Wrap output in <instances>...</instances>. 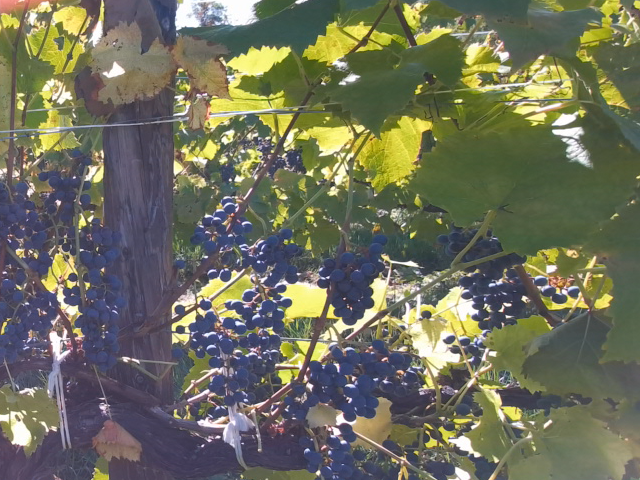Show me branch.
<instances>
[{
  "instance_id": "1",
  "label": "branch",
  "mask_w": 640,
  "mask_h": 480,
  "mask_svg": "<svg viewBox=\"0 0 640 480\" xmlns=\"http://www.w3.org/2000/svg\"><path fill=\"white\" fill-rule=\"evenodd\" d=\"M352 135L353 136L347 141L345 148L343 149L338 159L336 160L332 171L326 176L324 183L321 184L319 188L314 192V194L305 201V203L302 205V207L298 211H296L293 215H291L289 218L285 219L282 222V225L284 227L290 226L293 222L297 221L300 217H302L308 211L311 205L320 198L321 194L325 190H328L331 187V183L333 179L338 175L342 167V164L344 163L346 157L349 155L350 151L352 150L353 145L361 138L360 143L357 145V147L355 148V151L352 153L351 157L349 158V161L347 162L348 203L346 205V209L343 214V220L339 227L340 243L337 246L336 251L334 252V268L337 271H340L342 269L341 254L343 253V250L346 247L342 232L347 230L348 224L351 220L353 207L355 205V190H354V170L356 167L355 163H356V160L359 158V155L362 153V150L367 145L368 140L371 138V134L369 132L365 133V130L363 128L354 130L352 132Z\"/></svg>"
},
{
  "instance_id": "2",
  "label": "branch",
  "mask_w": 640,
  "mask_h": 480,
  "mask_svg": "<svg viewBox=\"0 0 640 480\" xmlns=\"http://www.w3.org/2000/svg\"><path fill=\"white\" fill-rule=\"evenodd\" d=\"M505 255H506V252L504 250H499V251H497L495 253L484 254V255H481L479 257H475L473 259L462 261L460 263L459 262H454L445 271L441 272L440 274H437V275L433 276L432 278H429L428 280L423 281L418 286V288L415 289L414 291L409 292L403 298H400L396 302H393L392 304H390L386 309H381L375 315H372L370 318L364 320L361 324H359L352 332H350L339 343V347L341 349H344L355 337H357L359 335V333L361 331H363L364 329H366L367 327H369L373 323L379 321L383 317H387L395 309H398L402 305H405L406 303H409L413 298H416L417 296H419L426 288H428L431 285H434L435 283H437L439 281H442L443 279L449 277L457 269L458 270H462V269H465V268H468V267H471V266H475V265L481 264V263L486 262V261L497 260V259H500V258L504 257Z\"/></svg>"
},
{
  "instance_id": "3",
  "label": "branch",
  "mask_w": 640,
  "mask_h": 480,
  "mask_svg": "<svg viewBox=\"0 0 640 480\" xmlns=\"http://www.w3.org/2000/svg\"><path fill=\"white\" fill-rule=\"evenodd\" d=\"M299 119V115L298 114H293L286 125V128L283 132V134L281 135L278 143L276 144L275 148L272 150V152L267 155L262 163L261 168L259 169L255 179L253 180V183L250 185L247 194L244 196V198L241 200V202L239 203V205L236 208V214L238 216H241L243 214V211L245 209V207L248 205V203L250 202V200L253 198L258 186L260 185V183L262 182V180L265 177V173L269 168V165L271 163V161H273L275 159V157L280 153V151L282 150L283 146L285 145L287 139L289 138L294 124L296 123V121Z\"/></svg>"
},
{
  "instance_id": "4",
  "label": "branch",
  "mask_w": 640,
  "mask_h": 480,
  "mask_svg": "<svg viewBox=\"0 0 640 480\" xmlns=\"http://www.w3.org/2000/svg\"><path fill=\"white\" fill-rule=\"evenodd\" d=\"M337 284L335 282H331L329 284V287L327 289V293L323 302V306H322V310L320 312L319 318H318V323L315 326V329L313 331V335L311 338V342L309 343L308 348L305 350V354L303 356V360H302V367L300 369V372L298 374L297 377V381L299 383H302L305 379V376L307 375V371L309 369V363H310V358L312 356L313 351L315 350L318 340L320 338V334L322 329L325 327V321L327 318V314L329 312V308L331 305V301L333 299L334 296V292L336 290Z\"/></svg>"
},
{
  "instance_id": "5",
  "label": "branch",
  "mask_w": 640,
  "mask_h": 480,
  "mask_svg": "<svg viewBox=\"0 0 640 480\" xmlns=\"http://www.w3.org/2000/svg\"><path fill=\"white\" fill-rule=\"evenodd\" d=\"M29 3H30V0L24 1L23 13L16 27V32L13 39V47L11 50L12 94H11V102H10V108H9V129H14V110H15L16 96H17L16 53L18 50V41L21 35V30L29 12Z\"/></svg>"
},
{
  "instance_id": "6",
  "label": "branch",
  "mask_w": 640,
  "mask_h": 480,
  "mask_svg": "<svg viewBox=\"0 0 640 480\" xmlns=\"http://www.w3.org/2000/svg\"><path fill=\"white\" fill-rule=\"evenodd\" d=\"M513 269L515 273L524 282V285L526 286L528 291V296L531 298L532 302L534 303L537 311L542 316V318L548 321L550 324L560 326L562 324V320L558 316L553 314L550 311V309L543 303V300L539 296L538 292L536 291L535 287L533 286L531 280L529 279L523 267L520 264H515L513 266Z\"/></svg>"
},
{
  "instance_id": "7",
  "label": "branch",
  "mask_w": 640,
  "mask_h": 480,
  "mask_svg": "<svg viewBox=\"0 0 640 480\" xmlns=\"http://www.w3.org/2000/svg\"><path fill=\"white\" fill-rule=\"evenodd\" d=\"M219 257H220V254L218 252H215L213 255H211L209 259L200 267L198 271H196L192 275V277L186 283H183L180 287H178L173 291V293L160 306L159 310L157 311V314L159 316H162L166 312V310L170 307V305L174 302V300L183 292L191 288L198 281V279L202 275H204L206 271L219 259Z\"/></svg>"
},
{
  "instance_id": "8",
  "label": "branch",
  "mask_w": 640,
  "mask_h": 480,
  "mask_svg": "<svg viewBox=\"0 0 640 480\" xmlns=\"http://www.w3.org/2000/svg\"><path fill=\"white\" fill-rule=\"evenodd\" d=\"M296 384L294 379H290L283 384L278 390H276L271 395L265 397L263 400L259 401L255 404L248 412L247 418L249 420H254L258 414L266 410L268 407L274 405L276 402L284 398L289 392L290 389Z\"/></svg>"
},
{
  "instance_id": "9",
  "label": "branch",
  "mask_w": 640,
  "mask_h": 480,
  "mask_svg": "<svg viewBox=\"0 0 640 480\" xmlns=\"http://www.w3.org/2000/svg\"><path fill=\"white\" fill-rule=\"evenodd\" d=\"M390 10H391V6L389 4H386L383 7V9L381 10L380 14L374 19V21L372 23V26L370 27L369 31L366 33L364 38H362L358 43H356L355 45H352L350 47V50L352 52H357L358 50H360L361 48H363L365 45H367L370 42L371 38L377 32L381 22L388 15Z\"/></svg>"
},
{
  "instance_id": "10",
  "label": "branch",
  "mask_w": 640,
  "mask_h": 480,
  "mask_svg": "<svg viewBox=\"0 0 640 480\" xmlns=\"http://www.w3.org/2000/svg\"><path fill=\"white\" fill-rule=\"evenodd\" d=\"M392 5H393V8L395 10V14L397 16V19H398V21H399V23L401 25V28H402V30L405 32V34L408 37L409 44L412 47H415L417 45L415 35H414L413 31L410 29V27H409V25H408V23H407V21H406V19L404 17L402 8L400 6V3L397 0H394L392 2Z\"/></svg>"
},
{
  "instance_id": "11",
  "label": "branch",
  "mask_w": 640,
  "mask_h": 480,
  "mask_svg": "<svg viewBox=\"0 0 640 480\" xmlns=\"http://www.w3.org/2000/svg\"><path fill=\"white\" fill-rule=\"evenodd\" d=\"M251 273L249 268L243 269L241 272H238L233 277H231L224 285L219 287L213 294L209 296L211 301H215L218 297H220L223 293H225L228 289H230L236 282L243 279L245 276H248Z\"/></svg>"
},
{
  "instance_id": "12",
  "label": "branch",
  "mask_w": 640,
  "mask_h": 480,
  "mask_svg": "<svg viewBox=\"0 0 640 480\" xmlns=\"http://www.w3.org/2000/svg\"><path fill=\"white\" fill-rule=\"evenodd\" d=\"M13 158H14V140H9V156H8V166H7V188L11 194L15 193L12 185V169H13Z\"/></svg>"
},
{
  "instance_id": "13",
  "label": "branch",
  "mask_w": 640,
  "mask_h": 480,
  "mask_svg": "<svg viewBox=\"0 0 640 480\" xmlns=\"http://www.w3.org/2000/svg\"><path fill=\"white\" fill-rule=\"evenodd\" d=\"M286 409H287V405L285 403H282L279 406V408L277 409V411L266 422H264L260 426L259 431L260 432H265L270 426H272L283 415V413L286 411Z\"/></svg>"
},
{
  "instance_id": "14",
  "label": "branch",
  "mask_w": 640,
  "mask_h": 480,
  "mask_svg": "<svg viewBox=\"0 0 640 480\" xmlns=\"http://www.w3.org/2000/svg\"><path fill=\"white\" fill-rule=\"evenodd\" d=\"M181 319H182V316L180 314H176L173 318L165 320L162 323H159L158 325L151 327L149 329V332L151 334H156L166 329L167 327L177 324Z\"/></svg>"
}]
</instances>
